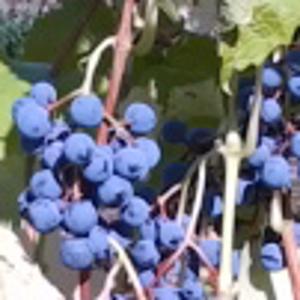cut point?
<instances>
[{"instance_id":"7d7e1d6f","label":"cut point","mask_w":300,"mask_h":300,"mask_svg":"<svg viewBox=\"0 0 300 300\" xmlns=\"http://www.w3.org/2000/svg\"><path fill=\"white\" fill-rule=\"evenodd\" d=\"M115 36H106L100 44L95 49V52H91L87 57V63L85 66V76L83 80V89L85 91H88L90 89V85L92 83L93 73L95 66L97 64V61L99 60L102 52L107 47L109 43L114 42Z\"/></svg>"},{"instance_id":"6a23745f","label":"cut point","mask_w":300,"mask_h":300,"mask_svg":"<svg viewBox=\"0 0 300 300\" xmlns=\"http://www.w3.org/2000/svg\"><path fill=\"white\" fill-rule=\"evenodd\" d=\"M226 146L224 144H216L207 151L201 153L193 162L188 174L186 175L184 186L179 200L177 216L181 217L186 213L187 193L191 178L196 171V183L194 187V196L190 206V216L195 222L199 220V210L203 200V192L205 188V165L206 162L212 160L215 156L224 154Z\"/></svg>"}]
</instances>
